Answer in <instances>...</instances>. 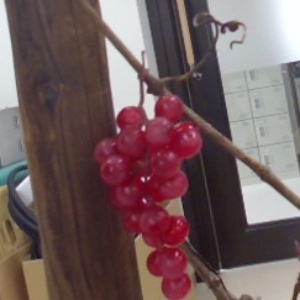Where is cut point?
Masks as SVG:
<instances>
[{
  "label": "cut point",
  "mask_w": 300,
  "mask_h": 300,
  "mask_svg": "<svg viewBox=\"0 0 300 300\" xmlns=\"http://www.w3.org/2000/svg\"><path fill=\"white\" fill-rule=\"evenodd\" d=\"M145 54H146V51H142V65H141V67L139 69V73H138V80L140 81V93H139L138 107L144 106V83H145V68H146Z\"/></svg>",
  "instance_id": "cut-point-1"
}]
</instances>
